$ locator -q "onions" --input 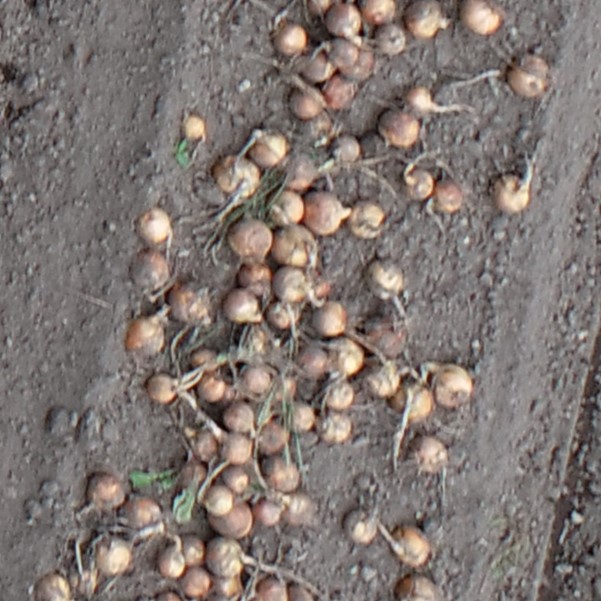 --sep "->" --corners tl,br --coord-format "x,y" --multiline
333,136 -> 361,165
159,544 -> 183,577
214,157 -> 257,197
308,301 -> 345,336
243,329 -> 270,361
180,534 -> 204,566
232,261 -> 273,291
219,465 -> 251,494
207,574 -> 242,600
316,409 -> 352,443
287,587 -> 315,601
210,499 -> 252,538
274,191 -> 305,224
503,54 -> 548,96
324,4 -> 360,38
255,421 -> 288,454
237,364 -> 272,399
323,76 -> 355,108
224,288 -> 262,323
253,499 -> 278,525
307,52 -> 332,82
190,346 -> 217,373
432,362 -> 469,407
273,264 -> 309,301
86,471 -> 125,510
99,537 -> 134,573
197,371 -> 231,405
306,0 -> 333,14
490,175 -> 529,213
409,435 -> 445,472
123,315 -> 164,354
201,536 -> 246,578
361,0 -> 397,26
289,403 -> 316,432
119,493 -> 160,534
290,87 -> 323,119
179,568 -> 211,597
272,22 -> 307,55
179,113 -> 207,141
203,485 -> 235,516
31,572 -> 71,600
134,208 -> 170,245
220,402 -> 257,433
428,174 -> 463,213
248,129 -> 286,168
330,39 -> 356,66
374,24 -> 404,53
296,342 -> 332,378
228,220 -> 271,259
281,492 -> 313,522
461,1 -> 500,36
301,192 -> 348,235
402,1 -> 446,39
129,247 -> 170,293
143,372 -> 178,403
191,430 -> 221,459
393,385 -> 433,422
304,278 -> 329,301
366,363 -> 400,399
267,225 -> 314,266
378,109 -> 418,148
329,339 -> 365,377
264,301 -> 297,331
342,49 -> 372,82
406,84 -> 435,115
402,165 -> 435,202
370,318 -> 403,354
348,197 -> 389,239
287,162 -> 316,190
266,455 -> 301,491
222,432 -> 254,462
250,576 -> 291,600
367,263 -> 404,295
156,591 -> 179,601
321,380 -> 354,410
397,573 -> 438,601
385,524 -> 429,564
347,512 -> 375,542
171,283 -> 214,324
178,463 -> 205,489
